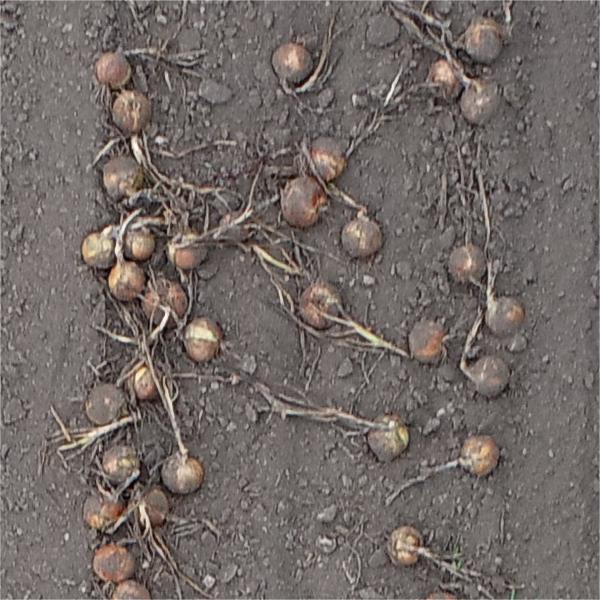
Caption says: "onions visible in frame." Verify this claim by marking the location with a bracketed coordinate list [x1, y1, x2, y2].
[180, 315, 222, 359]
[99, 444, 135, 480]
[368, 414, 407, 458]
[445, 243, 482, 279]
[108, 579, 150, 599]
[124, 229, 157, 259]
[464, 19, 503, 61]
[409, 319, 445, 363]
[427, 57, 458, 90]
[300, 280, 339, 325]
[169, 237, 204, 270]
[487, 296, 524, 332]
[147, 278, 185, 321]
[272, 42, 312, 84]
[141, 487, 167, 524]
[307, 139, 343, 180]
[161, 454, 203, 493]
[339, 216, 381, 256]
[82, 383, 125, 423]
[93, 52, 129, 86]
[92, 542, 136, 581]
[81, 229, 115, 265]
[110, 93, 150, 131]
[278, 176, 324, 224]
[121, 362, 156, 398]
[458, 434, 497, 474]
[107, 260, 146, 297]
[458, 82, 497, 122]
[389, 525, 420, 565]
[103, 157, 139, 195]
[86, 486, 129, 528]
[463, 353, 507, 394]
